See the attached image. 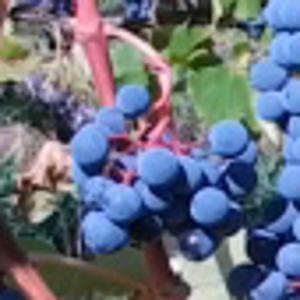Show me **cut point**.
<instances>
[{
  "label": "cut point",
  "instance_id": "obj_1",
  "mask_svg": "<svg viewBox=\"0 0 300 300\" xmlns=\"http://www.w3.org/2000/svg\"><path fill=\"white\" fill-rule=\"evenodd\" d=\"M101 32L106 35L118 37L119 39L132 44L134 47L144 52L156 64L160 75V91L167 93L169 91V70L164 58L156 51V49L141 40L135 34H132L123 28L103 24Z\"/></svg>",
  "mask_w": 300,
  "mask_h": 300
}]
</instances>
